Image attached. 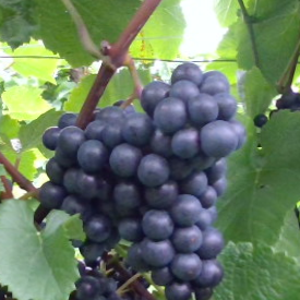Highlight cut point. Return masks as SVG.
<instances>
[{
	"label": "cut point",
	"mask_w": 300,
	"mask_h": 300,
	"mask_svg": "<svg viewBox=\"0 0 300 300\" xmlns=\"http://www.w3.org/2000/svg\"><path fill=\"white\" fill-rule=\"evenodd\" d=\"M121 65L125 66L129 69L131 78H132V82L134 84V97L136 99H140L141 94H142V87L139 85V82L137 80L136 71H135V67H134V61L132 60L131 56L126 55L125 58L122 60Z\"/></svg>",
	"instance_id": "1"
}]
</instances>
